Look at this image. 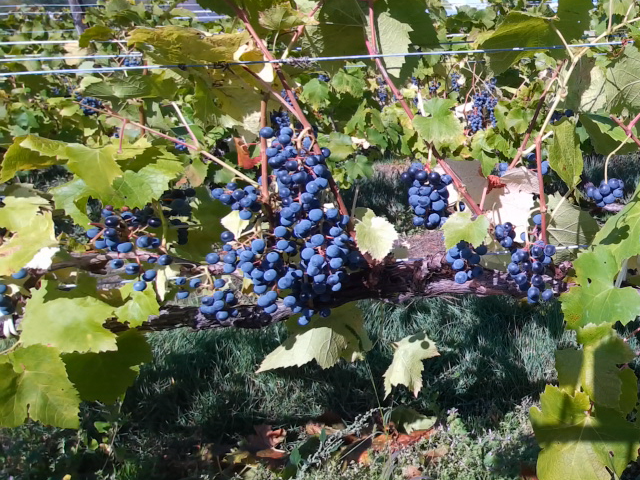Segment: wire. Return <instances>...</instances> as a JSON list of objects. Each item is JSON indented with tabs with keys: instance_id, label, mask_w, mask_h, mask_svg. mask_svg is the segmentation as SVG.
<instances>
[{
	"instance_id": "wire-1",
	"label": "wire",
	"mask_w": 640,
	"mask_h": 480,
	"mask_svg": "<svg viewBox=\"0 0 640 480\" xmlns=\"http://www.w3.org/2000/svg\"><path fill=\"white\" fill-rule=\"evenodd\" d=\"M565 44H553L545 46H522L511 48H483L460 51H430V52H393L384 54H358L345 56H313L312 58H280L276 60L242 59L240 61H217L205 63H188L178 65H157V64H133L121 67H101V68H73V69H40L33 71L0 72V77L14 78L20 76H35L42 74L68 75L75 73H103V72H123L135 69H155V70H180L190 68H208L219 66H242L244 64L255 65H278L282 63H323L333 61H348L361 59H387V58H415L432 56H462L485 53H513L523 51H547L555 49H565Z\"/></svg>"
}]
</instances>
